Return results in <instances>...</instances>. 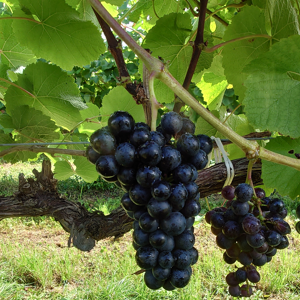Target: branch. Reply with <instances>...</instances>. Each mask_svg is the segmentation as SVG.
<instances>
[{
    "instance_id": "branch-1",
    "label": "branch",
    "mask_w": 300,
    "mask_h": 300,
    "mask_svg": "<svg viewBox=\"0 0 300 300\" xmlns=\"http://www.w3.org/2000/svg\"><path fill=\"white\" fill-rule=\"evenodd\" d=\"M89 5L94 11L97 21L103 31L108 42L107 47L111 52L117 67L119 76L117 80L122 82V86L133 95L136 104H142L145 111V123L150 126L152 124V100L149 91V75L150 70H155L157 76L154 79H160L174 92L173 111L178 112L184 117L185 103L195 110L201 117L210 124L214 129L222 133L232 143L240 147L246 158H259L269 162L283 164L294 170L300 171V160L285 155L275 153L261 147L256 140H246L233 129L228 127L224 122L215 117L204 105L197 101L188 91L193 74L197 66L200 54L207 47L204 42V22L207 10L208 0H200L199 22L195 41H191L193 47L192 58L189 68L186 72L184 82L181 85L167 69L161 60L156 59L145 49H143L115 20V18L105 9L99 0H88ZM113 31L124 41L143 61V82L139 80L131 81V76L125 66L123 59L121 40L114 36Z\"/></svg>"
}]
</instances>
